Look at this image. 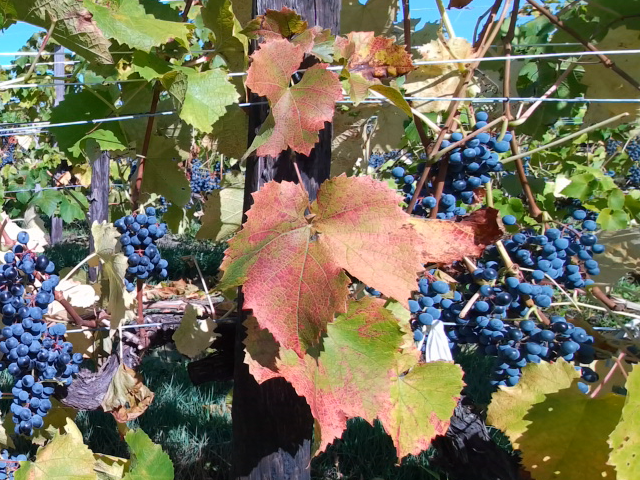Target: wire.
<instances>
[{"mask_svg":"<svg viewBox=\"0 0 640 480\" xmlns=\"http://www.w3.org/2000/svg\"><path fill=\"white\" fill-rule=\"evenodd\" d=\"M405 101H421V100H434V101H469L478 100L483 102H495V103H510V102H524V103H539V102H574V103H640V98H576V97H536L527 98L525 96L497 98V97H485L480 95H467V96H436V95H419V96H405Z\"/></svg>","mask_w":640,"mask_h":480,"instance_id":"wire-1","label":"wire"},{"mask_svg":"<svg viewBox=\"0 0 640 480\" xmlns=\"http://www.w3.org/2000/svg\"><path fill=\"white\" fill-rule=\"evenodd\" d=\"M598 54L629 55L640 54V49H595L587 52H563V53H534L530 55H507V56H470L458 58H445L441 60H421L413 61V66L423 65H444L448 63L473 62V61H509V60H532L537 58H565V57H590Z\"/></svg>","mask_w":640,"mask_h":480,"instance_id":"wire-2","label":"wire"},{"mask_svg":"<svg viewBox=\"0 0 640 480\" xmlns=\"http://www.w3.org/2000/svg\"><path fill=\"white\" fill-rule=\"evenodd\" d=\"M181 113H182L181 109H163V110H156L148 113H137V114H132L128 116L114 115L107 118H82L76 121H63V122H51L47 124H32V125H26V126L3 127V128H0V133L28 131V130H34V129H49L53 127L78 126L85 123H109L116 120L120 122H125V121H131L134 119H140V118H151L158 115L168 116L169 114H181Z\"/></svg>","mask_w":640,"mask_h":480,"instance_id":"wire-3","label":"wire"},{"mask_svg":"<svg viewBox=\"0 0 640 480\" xmlns=\"http://www.w3.org/2000/svg\"><path fill=\"white\" fill-rule=\"evenodd\" d=\"M87 82H62V83H32L29 85H5L0 84L2 90H31L34 88H64V87H87Z\"/></svg>","mask_w":640,"mask_h":480,"instance_id":"wire-4","label":"wire"},{"mask_svg":"<svg viewBox=\"0 0 640 480\" xmlns=\"http://www.w3.org/2000/svg\"><path fill=\"white\" fill-rule=\"evenodd\" d=\"M180 320L167 321V322H148V323H134L130 325L118 324L117 328L120 330H133L136 328H151V327H169L180 325Z\"/></svg>","mask_w":640,"mask_h":480,"instance_id":"wire-5","label":"wire"},{"mask_svg":"<svg viewBox=\"0 0 640 480\" xmlns=\"http://www.w3.org/2000/svg\"><path fill=\"white\" fill-rule=\"evenodd\" d=\"M110 326L109 325H104V326H96V327H82V328H78V329H68L67 330V334L68 335H77L80 333H84V332H98V331H106L109 330Z\"/></svg>","mask_w":640,"mask_h":480,"instance_id":"wire-6","label":"wire"}]
</instances>
